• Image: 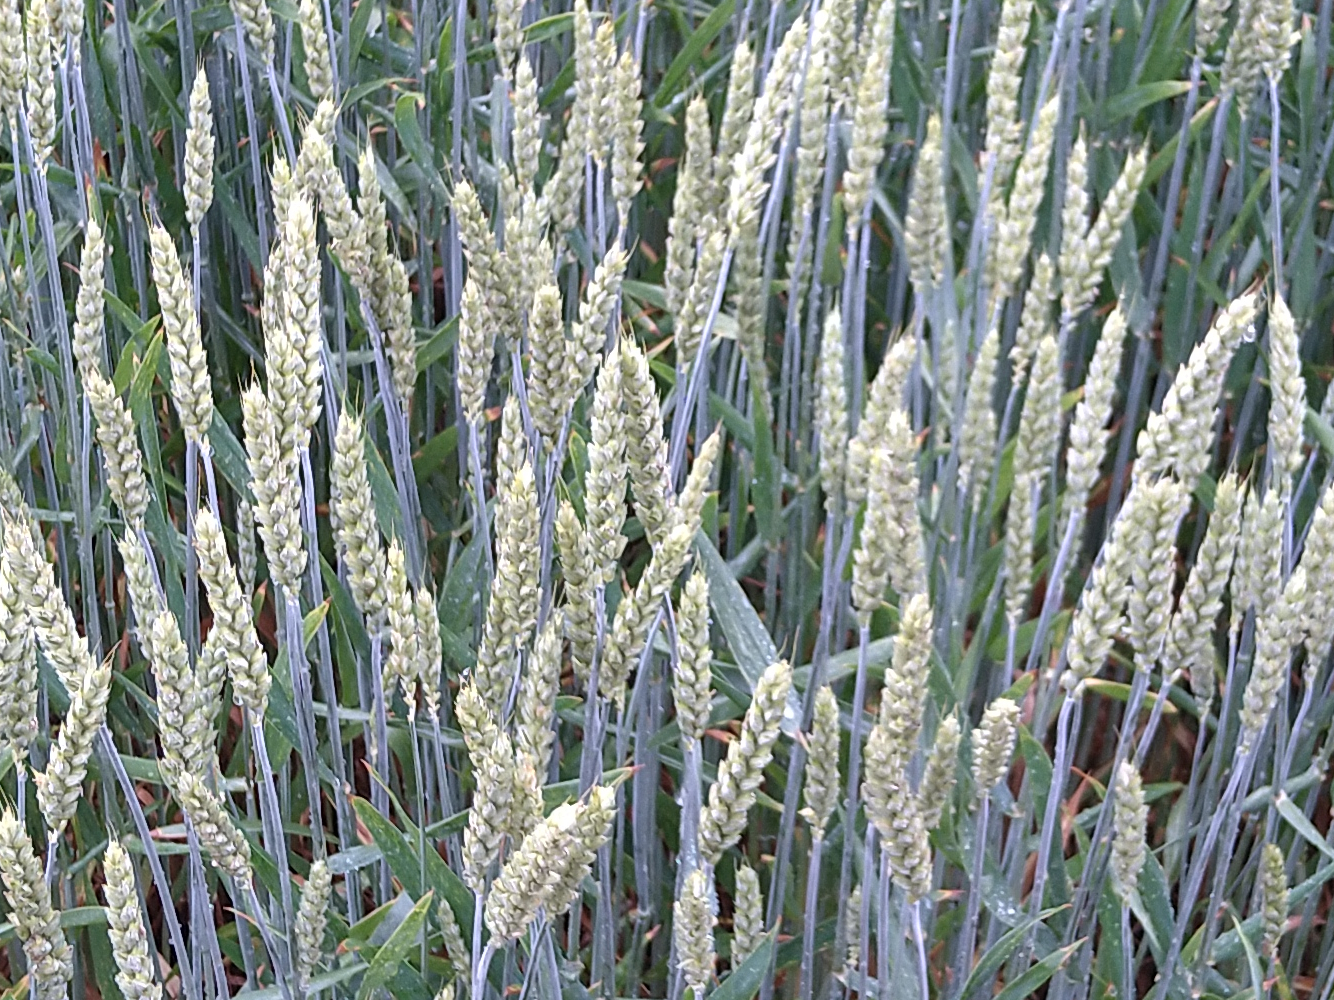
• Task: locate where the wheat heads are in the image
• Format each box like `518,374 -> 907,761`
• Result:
992,126 -> 1026,205
803,687 -> 841,828
844,7 -> 897,227
514,54 -> 542,190
25,0 -> 56,159
450,684 -> 536,839
1233,492 -> 1260,612
1289,473 -> 1334,654
1268,295 -> 1307,473
296,860 -> 332,983
149,231 -> 216,435
904,124 -> 940,279
451,184 -> 520,336
598,598 -> 634,702
389,262 -> 416,401
935,322 -> 954,405
928,139 -> 949,277
718,45 -> 756,165
665,169 -> 694,310
860,341 -> 917,445
1223,0 -> 1266,101
0,463 -> 39,547
75,222 -> 105,377
817,312 -> 848,509
1018,339 -> 1063,478
299,134 -> 371,286
1060,139 -> 1089,274
1060,310 -> 1128,529
684,97 -> 713,218
0,558 -> 40,787
1220,0 -> 1295,79
555,506 -> 598,680
613,57 -> 641,203
728,21 -> 809,221
796,0 -> 832,199
358,153 -> 391,308
1179,384 -> 1216,474
46,0 -> 85,44
1111,763 -> 1148,896
103,844 -> 165,1000
826,0 -> 862,98
496,0 -> 526,70
160,754 -> 251,885
266,330 -> 301,461
2,630 -> 34,752
885,419 -> 927,598
1012,256 -> 1054,375
1303,540 -> 1334,665
415,589 -> 442,708
472,735 -> 517,893
468,294 -> 496,414
238,501 -> 256,594
859,749 -> 934,896
674,432 -> 722,534
508,467 -> 542,641
240,391 -> 307,593
184,68 -> 216,220
1005,477 -> 1036,615
84,375 -> 148,523
193,514 -> 270,712
1240,571 -> 1309,742
568,250 -> 628,395
270,158 -> 293,239
959,330 -> 1001,478
882,597 -> 934,753
515,616 -> 564,776
585,357 -> 626,576
862,0 -> 895,69
200,0 -> 275,60
553,9 -> 595,223
294,102 -> 336,193
486,793 -> 584,940
286,203 -> 323,426
972,701 -> 1021,790
546,788 -> 616,911
673,872 -> 716,985
1134,299 -> 1259,482
1196,0 -> 1260,57
177,630 -> 227,778
119,534 -> 160,654
677,228 -> 727,366
996,100 -> 1059,287
617,528 -> 694,656
196,626 -> 229,725
152,620 -> 210,774
384,547 -> 416,689
591,25 -> 617,156
675,575 -> 713,738
264,240 -> 283,334
986,0 -> 1042,151
973,412 -> 998,508
477,550 -> 521,705
846,441 -> 868,510
1068,147 -> 1149,312
299,0 -> 334,102
981,197 -> 1004,286
732,218 -> 756,347
1253,492 -> 1285,615
0,817 -> 74,983
695,667 -> 794,865
789,201 -> 813,305
527,288 -> 565,441
734,865 -> 763,970
1063,491 -> 1166,680
1261,845 -> 1288,954
495,398 -> 524,544
459,283 -> 486,417
438,898 -> 472,992
0,528 -> 95,696
330,415 -> 386,625
0,0 -> 25,109
621,347 -> 671,536
852,453 -> 894,608
1129,491 -> 1186,668
846,886 -> 863,966
1323,325 -> 1334,420
37,667 -> 114,829
1162,481 -> 1245,677
515,178 -> 562,294
22,938 -> 67,1000
513,747 -> 547,846
918,718 -> 962,827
